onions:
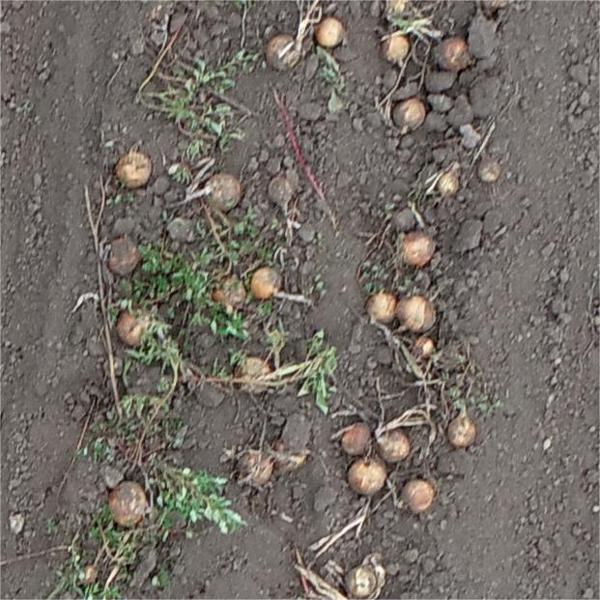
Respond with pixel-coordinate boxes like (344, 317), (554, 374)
(384, 0), (410, 13)
(440, 175), (459, 197)
(267, 174), (295, 203)
(101, 236), (139, 276)
(415, 335), (437, 356)
(338, 422), (371, 455)
(343, 560), (383, 596)
(279, 444), (305, 471)
(233, 354), (270, 393)
(246, 264), (279, 298)
(314, 17), (344, 48)
(382, 32), (409, 59)
(106, 481), (148, 525)
(399, 477), (434, 510)
(115, 311), (144, 344)
(367, 290), (396, 322)
(266, 33), (300, 68)
(392, 96), (424, 127)
(397, 294), (433, 330)
(446, 413), (478, 446)
(114, 151), (150, 187)
(348, 456), (385, 492)
(435, 35), (470, 69)
(400, 231), (434, 263)
(378, 430), (411, 461)
(478, 157), (502, 181)
(245, 452), (273, 484)
(204, 172), (239, 212)
(213, 279), (244, 306)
